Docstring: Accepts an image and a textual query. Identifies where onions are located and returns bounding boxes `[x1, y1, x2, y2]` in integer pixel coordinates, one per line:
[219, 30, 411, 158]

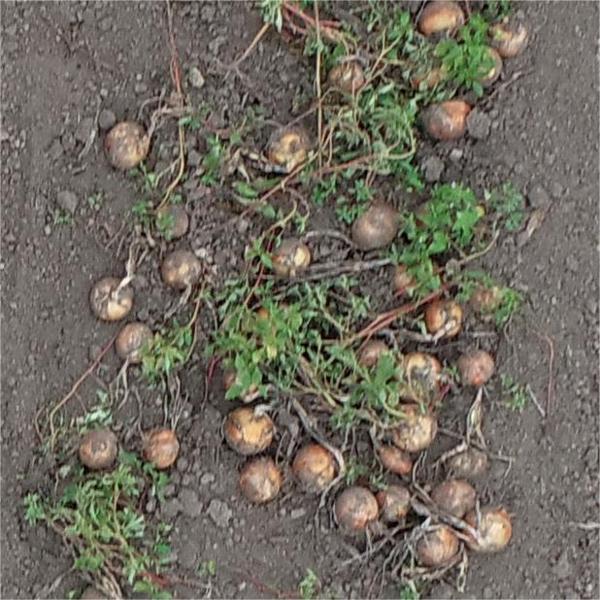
[447, 446, 486, 482]
[465, 280, 499, 315]
[271, 239, 310, 275]
[103, 120, 148, 168]
[89, 276, 132, 319]
[356, 341, 388, 370]
[238, 457, 283, 501]
[377, 485, 408, 518]
[403, 352, 437, 386]
[328, 58, 364, 93]
[422, 98, 470, 140]
[257, 303, 302, 330]
[159, 247, 201, 287]
[77, 427, 115, 467]
[266, 125, 307, 168]
[456, 349, 493, 385]
[226, 360, 260, 395]
[424, 301, 459, 336]
[415, 522, 460, 565]
[480, 47, 500, 84]
[391, 406, 434, 451]
[434, 478, 474, 519]
[331, 485, 378, 529]
[407, 65, 449, 90]
[155, 207, 188, 238]
[418, 1, 463, 35]
[349, 201, 397, 247]
[141, 426, 178, 466]
[291, 443, 337, 489]
[225, 406, 272, 451]
[394, 267, 425, 297]
[378, 443, 413, 477]
[491, 20, 527, 56]
[467, 511, 511, 550]
[112, 323, 149, 359]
